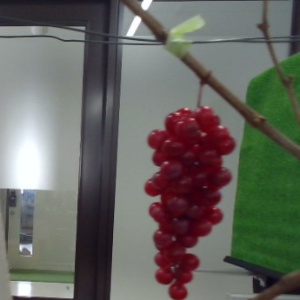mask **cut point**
<instances>
[{"label":"cut point","mask_w":300,"mask_h":300,"mask_svg":"<svg viewBox=\"0 0 300 300\" xmlns=\"http://www.w3.org/2000/svg\"><path fill=\"white\" fill-rule=\"evenodd\" d=\"M205 85V82L203 79H200V94L197 96V109H202V104L200 103L201 98L203 96V86Z\"/></svg>","instance_id":"1"}]
</instances>
